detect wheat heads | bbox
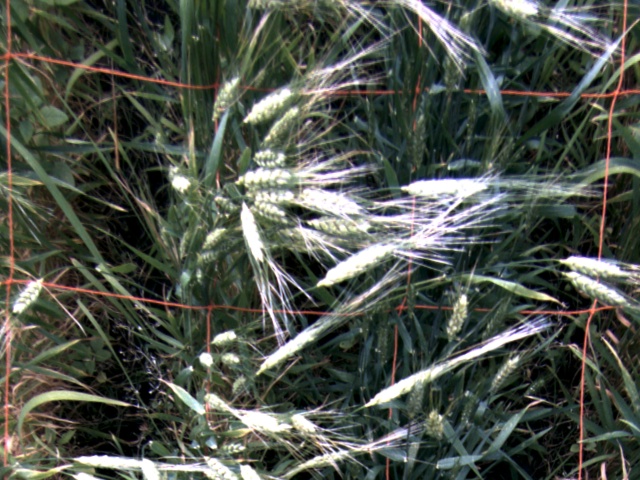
[493,355,516,391]
[142,464,166,478]
[216,194,237,211]
[196,352,214,369]
[316,243,394,286]
[202,455,235,480]
[266,103,301,137]
[172,174,198,199]
[200,77,238,120]
[216,444,245,456]
[495,141,514,168]
[258,324,317,371]
[443,294,465,340]
[205,392,234,414]
[363,364,446,404]
[400,175,482,200]
[240,201,267,261]
[300,188,364,218]
[243,0,287,11]
[223,353,239,366]
[245,84,294,124]
[493,0,537,19]
[410,115,424,166]
[290,413,325,438]
[252,150,286,165]
[9,277,43,315]
[443,15,469,94]
[73,458,164,470]
[561,270,638,319]
[427,410,443,439]
[213,328,232,348]
[249,191,294,202]
[560,254,640,288]
[197,252,214,262]
[237,168,298,186]
[464,102,475,144]
[412,382,428,414]
[179,232,189,258]
[249,200,286,224]
[241,412,287,434]
[205,225,228,248]
[306,216,372,234]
